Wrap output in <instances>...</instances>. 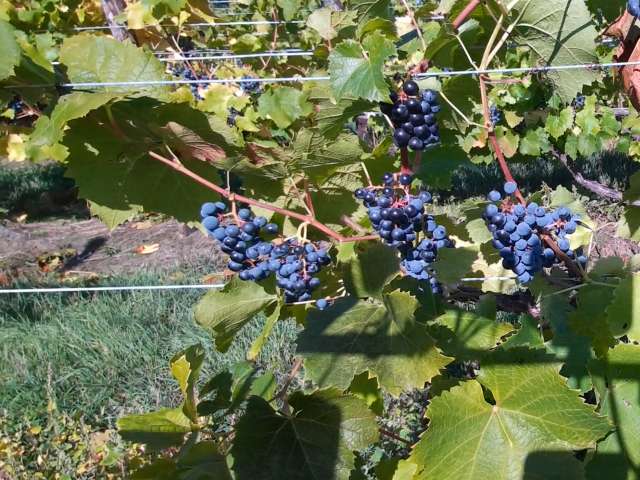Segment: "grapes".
Here are the masks:
<instances>
[{
  "label": "grapes",
  "mask_w": 640,
  "mask_h": 480,
  "mask_svg": "<svg viewBox=\"0 0 640 480\" xmlns=\"http://www.w3.org/2000/svg\"><path fill=\"white\" fill-rule=\"evenodd\" d=\"M227 206L221 202L204 203L199 211V215L204 219L202 227L207 233L215 238L221 245V250L230 255L227 268L231 272H239V278L243 281H262L268 278L272 272L280 278L276 284L280 288H285L284 301L286 303H297L309 300L320 283V279L314 273L322 271V265L328 266L332 262V256L323 249L314 251L312 245L296 246L297 240L290 239L287 243L274 247L272 243H267L263 238H259V229L265 227V232L272 235L278 231V226L274 223H267L263 216L252 218V212L248 208H240L237 215L243 221L242 231L237 225L219 227V213H225ZM305 253L307 266V281L299 273L304 268V263L299 260V255ZM259 255H268L269 261H260L255 264L256 268H251L246 262L248 259H256Z\"/></svg>",
  "instance_id": "obj_1"
},
{
  "label": "grapes",
  "mask_w": 640,
  "mask_h": 480,
  "mask_svg": "<svg viewBox=\"0 0 640 480\" xmlns=\"http://www.w3.org/2000/svg\"><path fill=\"white\" fill-rule=\"evenodd\" d=\"M394 193L392 186H385L382 189L384 197H375L377 192L366 188H359L354 192V196L363 200V205L369 208V219L372 227L379 231V236L385 238L387 247H397L402 253L401 267L406 274L416 281H428L434 293H441L443 287L440 282L429 274L427 268L434 276L436 270L429 267V263L437 262V253L441 248L454 249L456 244L446 236L447 227L437 225L435 218L431 214L424 217V229L431 234V239H422L417 247H413L416 235L422 230L423 205L432 200V194L428 190L421 191L418 198H411L410 204L405 207L389 206L393 202L391 198Z\"/></svg>",
  "instance_id": "obj_2"
},
{
  "label": "grapes",
  "mask_w": 640,
  "mask_h": 480,
  "mask_svg": "<svg viewBox=\"0 0 640 480\" xmlns=\"http://www.w3.org/2000/svg\"><path fill=\"white\" fill-rule=\"evenodd\" d=\"M481 217L488 223V231L493 233L492 247L499 249L503 259V267L512 269L519 283L531 282L541 268H550L552 264H560L561 260L554 256L551 248L541 246V238L533 232L532 227H549L559 219L566 220L563 228L557 230L558 245L566 256H572L571 242L566 234L576 232L577 222L581 214H572L565 206H559L552 213L544 207L530 203L527 208L522 204L513 206V213L499 212L495 204H488L481 212Z\"/></svg>",
  "instance_id": "obj_3"
},
{
  "label": "grapes",
  "mask_w": 640,
  "mask_h": 480,
  "mask_svg": "<svg viewBox=\"0 0 640 480\" xmlns=\"http://www.w3.org/2000/svg\"><path fill=\"white\" fill-rule=\"evenodd\" d=\"M421 99L407 98L405 103H400L392 110V116L401 122L395 130L393 143L396 146H408L413 151H421L428 144L437 143L440 134L437 131V117L441 103L437 100V94L431 88L421 91Z\"/></svg>",
  "instance_id": "obj_4"
}]
</instances>
